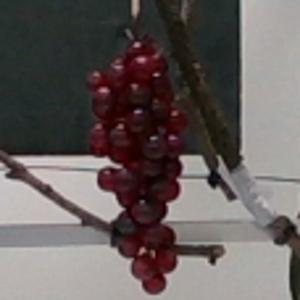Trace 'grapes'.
<instances>
[{
	"label": "grapes",
	"instance_id": "1",
	"mask_svg": "<svg viewBox=\"0 0 300 300\" xmlns=\"http://www.w3.org/2000/svg\"><path fill=\"white\" fill-rule=\"evenodd\" d=\"M171 65L169 52L143 37L84 78L94 94L93 114L102 120L89 128L90 152L123 165L104 167L97 176L100 189L115 195L125 209L110 221L109 230L120 255L132 260L131 274L150 295L164 291L166 275L179 265L172 250L176 232L161 222L168 214L165 202L181 192L180 158L193 125L189 89Z\"/></svg>",
	"mask_w": 300,
	"mask_h": 300
}]
</instances>
